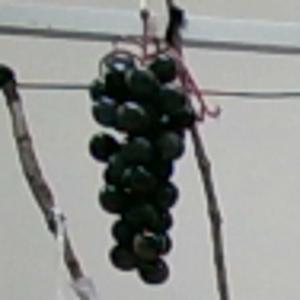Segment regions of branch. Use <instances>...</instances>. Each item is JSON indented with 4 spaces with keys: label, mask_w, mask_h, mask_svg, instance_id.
<instances>
[{
    "label": "branch",
    "mask_w": 300,
    "mask_h": 300,
    "mask_svg": "<svg viewBox=\"0 0 300 300\" xmlns=\"http://www.w3.org/2000/svg\"><path fill=\"white\" fill-rule=\"evenodd\" d=\"M192 140L194 162H196L200 181L206 199L207 221L209 223L211 254L213 258V267L216 277V292L219 300H232L230 286L227 282L226 256L224 252V217H222L218 198L215 192V185L212 178V160L205 151L202 142V132H200L199 123L196 119L195 125L189 131H186Z\"/></svg>",
    "instance_id": "branch-2"
},
{
    "label": "branch",
    "mask_w": 300,
    "mask_h": 300,
    "mask_svg": "<svg viewBox=\"0 0 300 300\" xmlns=\"http://www.w3.org/2000/svg\"><path fill=\"white\" fill-rule=\"evenodd\" d=\"M0 92L10 117L18 162L28 190L47 231L55 240L62 274L75 300H99L94 279L87 274L71 244L67 216L59 209L51 186L34 150V139L25 117L23 99L18 90L17 72L9 64L0 63Z\"/></svg>",
    "instance_id": "branch-1"
},
{
    "label": "branch",
    "mask_w": 300,
    "mask_h": 300,
    "mask_svg": "<svg viewBox=\"0 0 300 300\" xmlns=\"http://www.w3.org/2000/svg\"><path fill=\"white\" fill-rule=\"evenodd\" d=\"M165 9L168 15L167 24L162 33V41L164 42V54L176 58L180 65V72L177 76L180 87L184 88L191 94V79L189 70L185 65L184 53L182 49V31L189 24L188 13L178 6L175 0H164Z\"/></svg>",
    "instance_id": "branch-3"
}]
</instances>
